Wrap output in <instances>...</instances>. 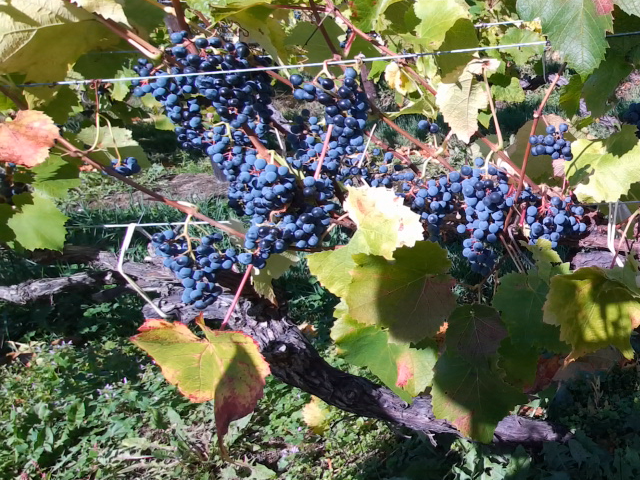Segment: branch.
I'll use <instances>...</instances> for the list:
<instances>
[{
  "label": "branch",
  "mask_w": 640,
  "mask_h": 480,
  "mask_svg": "<svg viewBox=\"0 0 640 480\" xmlns=\"http://www.w3.org/2000/svg\"><path fill=\"white\" fill-rule=\"evenodd\" d=\"M57 141L63 145L64 147H66L67 149H69L70 151H72L76 156H78L81 160H83L84 162L92 165L93 167H95L96 169L100 170V171H104L108 173V176L120 181L121 183H124L132 188H134L135 190H139L142 193L152 197L153 199L158 200L160 203L164 204L165 206L171 207L175 210H178L184 214L190 215L196 219L199 220H203L204 223L217 228L219 230H221L224 233H229L233 236H236L237 238H242L244 236V233L238 229H235L232 226H226L225 224H222L219 221H216L214 219H212L211 217L205 215L204 213H201L195 209L186 207L178 202H175L173 200H170L166 197H164L163 195H161L159 192H154L152 189H150L149 187L138 183L137 181L132 180L131 178H128L126 176H124L123 174H119L118 172L114 171L113 169H111L110 167L100 163L99 161H97L96 159L90 157L89 155H86L83 151H81L76 145H74L73 143H71L70 141H68L67 139H65L63 136H59L57 138Z\"/></svg>",
  "instance_id": "obj_1"
},
{
  "label": "branch",
  "mask_w": 640,
  "mask_h": 480,
  "mask_svg": "<svg viewBox=\"0 0 640 480\" xmlns=\"http://www.w3.org/2000/svg\"><path fill=\"white\" fill-rule=\"evenodd\" d=\"M476 136L487 146L491 147V149L496 153V155L502 159L507 165L510 166V168L516 173L518 174L520 177L518 178V184L516 186V196L514 199V203L512 204L508 214L506 215V219L503 225V229L502 232L506 233L508 231L509 228V224L511 221L512 216L514 215L517 207H518V200L517 197L519 195V193L521 192V188L523 186V181L525 180V182L531 187L533 188L536 192H539L541 190V186L536 183L526 172V166L528 164V156H529V151L531 148V144L527 143L525 145V149H524V153H523V161L521 163V167H519L507 154H505L498 146V144L494 141L489 139L485 134H483V132L481 130H478L476 132Z\"/></svg>",
  "instance_id": "obj_2"
},
{
  "label": "branch",
  "mask_w": 640,
  "mask_h": 480,
  "mask_svg": "<svg viewBox=\"0 0 640 480\" xmlns=\"http://www.w3.org/2000/svg\"><path fill=\"white\" fill-rule=\"evenodd\" d=\"M366 103L368 104L370 109L373 110L376 113L377 117H379L381 120H383L388 125H390L401 137L410 140L417 147H419V148L423 149L424 151H426L427 153L431 154L434 157L435 160H437L441 165H443L448 170H450V171H454L455 170V167L453 165L449 164L443 158H441L435 150L431 149L426 144L420 142L418 139H416L411 134H407L406 132H404L393 120H391L389 117L385 116L382 113V111L380 109H378L370 99H367Z\"/></svg>",
  "instance_id": "obj_3"
},
{
  "label": "branch",
  "mask_w": 640,
  "mask_h": 480,
  "mask_svg": "<svg viewBox=\"0 0 640 480\" xmlns=\"http://www.w3.org/2000/svg\"><path fill=\"white\" fill-rule=\"evenodd\" d=\"M106 24L114 28L115 30L119 31L121 34L132 39L143 50L148 51L154 56L161 57L166 63L171 64L174 68H178L180 66V63L176 59H174L172 56H169L165 51H163L162 49L153 47L150 44L144 42L137 34L123 27L121 24L117 23L116 21L112 19H108L106 21Z\"/></svg>",
  "instance_id": "obj_4"
},
{
  "label": "branch",
  "mask_w": 640,
  "mask_h": 480,
  "mask_svg": "<svg viewBox=\"0 0 640 480\" xmlns=\"http://www.w3.org/2000/svg\"><path fill=\"white\" fill-rule=\"evenodd\" d=\"M326 9L335 14V16L341 20L352 32H354L355 34H357L358 36H360L361 38L369 41L370 43H372L374 46H376L377 48H379V50L389 56H395L396 52L385 46L380 40H378L377 38H375L374 36H372L371 34L367 33L366 31H364L363 29L357 27L355 24L352 23V21L346 16L344 15L337 7L333 6L332 4H328L326 6Z\"/></svg>",
  "instance_id": "obj_5"
},
{
  "label": "branch",
  "mask_w": 640,
  "mask_h": 480,
  "mask_svg": "<svg viewBox=\"0 0 640 480\" xmlns=\"http://www.w3.org/2000/svg\"><path fill=\"white\" fill-rule=\"evenodd\" d=\"M175 16L178 23V27L180 29H185L187 33L186 39L183 40V44L188 50L189 53L198 54L199 50L196 49V46L193 42V33L191 31L190 26L188 25L186 15L184 12V6L182 4H177L175 6Z\"/></svg>",
  "instance_id": "obj_6"
},
{
  "label": "branch",
  "mask_w": 640,
  "mask_h": 480,
  "mask_svg": "<svg viewBox=\"0 0 640 480\" xmlns=\"http://www.w3.org/2000/svg\"><path fill=\"white\" fill-rule=\"evenodd\" d=\"M567 67V63L563 62L561 64V66L559 67L555 78L553 79L550 87L547 90V93L545 95V97L542 99V101L539 103L537 110L534 112L533 117H534V121L532 126L530 127V135L534 136L535 135V130L538 127L539 124V119H540V115L542 113V110L544 108V106L547 104L548 100L550 99V97L552 96L553 90L555 89L558 81L560 80L563 71L566 69Z\"/></svg>",
  "instance_id": "obj_7"
},
{
  "label": "branch",
  "mask_w": 640,
  "mask_h": 480,
  "mask_svg": "<svg viewBox=\"0 0 640 480\" xmlns=\"http://www.w3.org/2000/svg\"><path fill=\"white\" fill-rule=\"evenodd\" d=\"M364 134L381 149L394 155L395 157H398L400 160H402L407 165H409L412 168V170L417 174L418 177L422 176V171L408 157L404 156L402 153L398 152L397 150L386 146L382 141H380L377 137H375L368 129L364 130Z\"/></svg>",
  "instance_id": "obj_8"
},
{
  "label": "branch",
  "mask_w": 640,
  "mask_h": 480,
  "mask_svg": "<svg viewBox=\"0 0 640 480\" xmlns=\"http://www.w3.org/2000/svg\"><path fill=\"white\" fill-rule=\"evenodd\" d=\"M309 5H310V9L312 10L313 15L315 17V20H316V22L318 24V27H319V29L321 31V34H322V36H323V38H324V40H325V42H326V44H327V46H328V48L330 50V53L332 54V56H333V58L335 60H341V57L336 52V50L334 48V45L332 44L331 39L328 36V33H327L326 29H325V26H324V24H323V22L321 20V17H320V15L318 13V10H317V8L315 6L314 0H309Z\"/></svg>",
  "instance_id": "obj_9"
},
{
  "label": "branch",
  "mask_w": 640,
  "mask_h": 480,
  "mask_svg": "<svg viewBox=\"0 0 640 480\" xmlns=\"http://www.w3.org/2000/svg\"><path fill=\"white\" fill-rule=\"evenodd\" d=\"M397 62L400 64V66L405 70V72L407 74H409L412 79L420 86L422 87L427 93H429L431 96H435L437 94V91L432 88L426 81H424L410 66L409 64L405 61V59L403 60H397Z\"/></svg>",
  "instance_id": "obj_10"
},
{
  "label": "branch",
  "mask_w": 640,
  "mask_h": 480,
  "mask_svg": "<svg viewBox=\"0 0 640 480\" xmlns=\"http://www.w3.org/2000/svg\"><path fill=\"white\" fill-rule=\"evenodd\" d=\"M242 131L251 139V142L253 143L254 147L259 151V153L263 156V159L268 163H270V159H271L270 153L260 143L257 135L248 126H244L242 128Z\"/></svg>",
  "instance_id": "obj_11"
},
{
  "label": "branch",
  "mask_w": 640,
  "mask_h": 480,
  "mask_svg": "<svg viewBox=\"0 0 640 480\" xmlns=\"http://www.w3.org/2000/svg\"><path fill=\"white\" fill-rule=\"evenodd\" d=\"M196 15L204 22V24L207 26V28L209 29V31L211 32L212 36L214 38H218L219 34L217 33V31L215 30V28L213 27V25L211 24V22L208 20V18L202 14L201 11H197Z\"/></svg>",
  "instance_id": "obj_12"
},
{
  "label": "branch",
  "mask_w": 640,
  "mask_h": 480,
  "mask_svg": "<svg viewBox=\"0 0 640 480\" xmlns=\"http://www.w3.org/2000/svg\"><path fill=\"white\" fill-rule=\"evenodd\" d=\"M266 73H267L268 75H270L271 77H273V78H275V79H277V80L282 81L284 84H286V85H287V86H289V87H292V86H293V83H292L289 79H287L286 77H284L283 75H279V74L275 73L274 71H266Z\"/></svg>",
  "instance_id": "obj_13"
}]
</instances>
